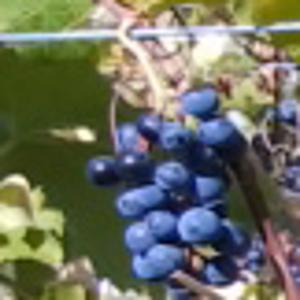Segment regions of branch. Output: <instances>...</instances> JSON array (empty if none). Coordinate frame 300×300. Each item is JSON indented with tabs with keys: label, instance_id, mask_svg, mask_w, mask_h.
<instances>
[{
	"label": "branch",
	"instance_id": "30e6481e",
	"mask_svg": "<svg viewBox=\"0 0 300 300\" xmlns=\"http://www.w3.org/2000/svg\"><path fill=\"white\" fill-rule=\"evenodd\" d=\"M231 165L238 178L242 196L254 224L257 227L264 250L278 274L287 300H300V288L295 274L289 266L286 255L280 246L277 230L266 203L263 191L257 180L256 171L243 153L231 158Z\"/></svg>",
	"mask_w": 300,
	"mask_h": 300
},
{
	"label": "branch",
	"instance_id": "325d2c04",
	"mask_svg": "<svg viewBox=\"0 0 300 300\" xmlns=\"http://www.w3.org/2000/svg\"><path fill=\"white\" fill-rule=\"evenodd\" d=\"M144 46L158 59L167 79L176 85L179 91H185L192 85L193 77L174 59L166 43L161 39H146Z\"/></svg>",
	"mask_w": 300,
	"mask_h": 300
},
{
	"label": "branch",
	"instance_id": "170604dd",
	"mask_svg": "<svg viewBox=\"0 0 300 300\" xmlns=\"http://www.w3.org/2000/svg\"><path fill=\"white\" fill-rule=\"evenodd\" d=\"M101 4L109 11H113L124 18L132 28H146L148 26V21L145 18H139L134 11L117 0H101Z\"/></svg>",
	"mask_w": 300,
	"mask_h": 300
}]
</instances>
